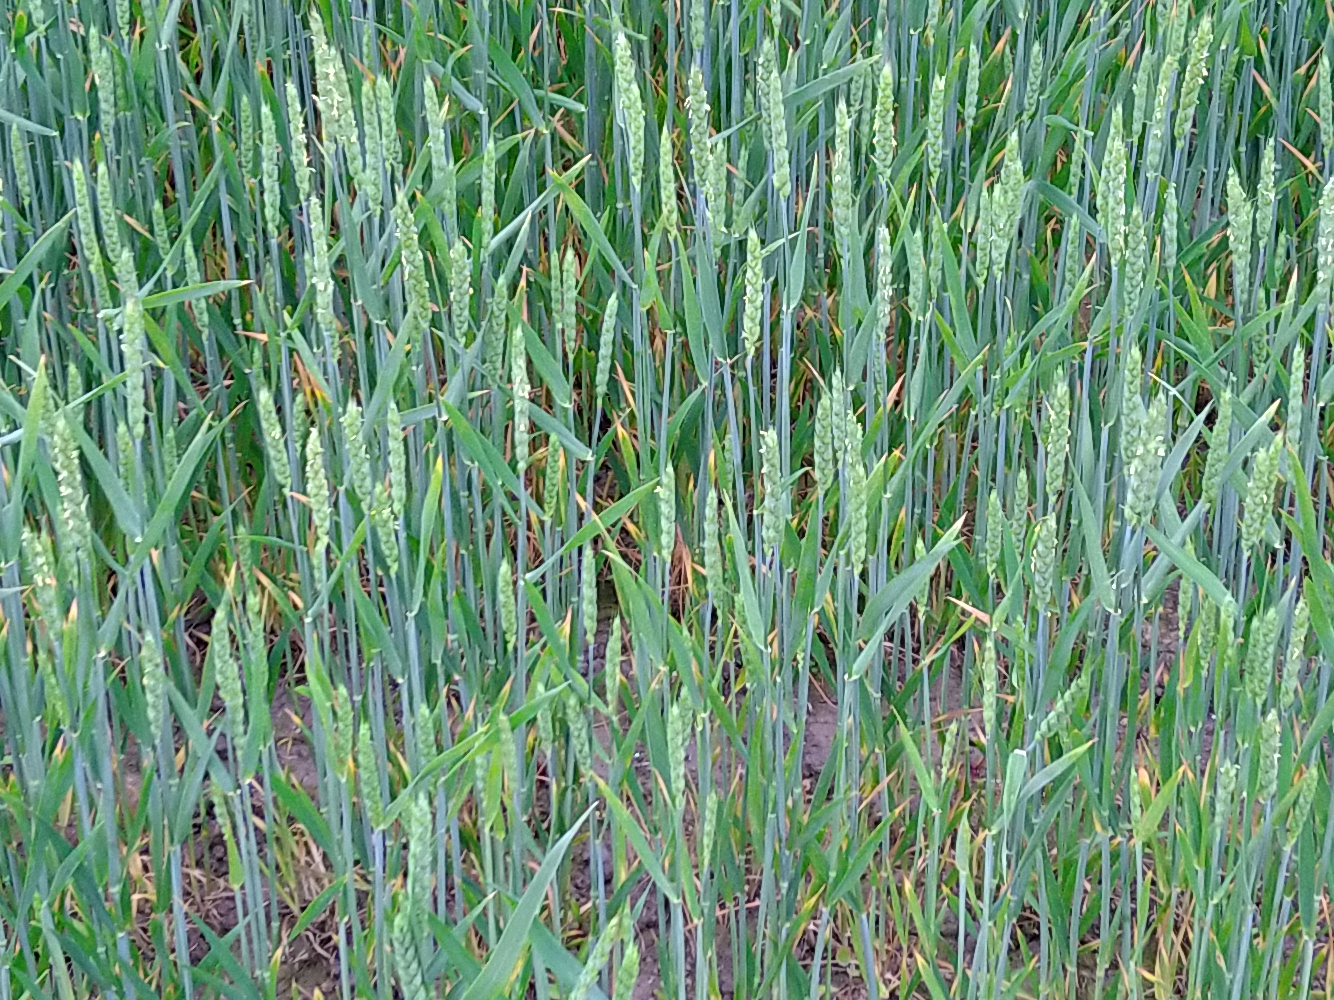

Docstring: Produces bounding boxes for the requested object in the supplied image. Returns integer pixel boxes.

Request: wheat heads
[976,186,990,283]
[1109,143,1127,262]
[626,85,645,187]
[153,200,169,261]
[475,750,488,824]
[765,0,778,29]
[1023,42,1044,123]
[703,792,717,864]
[833,102,851,254]
[358,722,382,825]
[1046,380,1070,496]
[847,57,866,126]
[873,64,895,180]
[362,79,382,210]
[734,592,759,684]
[1146,58,1175,172]
[1198,592,1216,669]
[65,359,89,418]
[1176,15,1214,141]
[378,77,401,171]
[140,633,164,741]
[499,561,517,644]
[1291,768,1318,845]
[371,484,399,571]
[915,539,928,614]
[1257,138,1276,246]
[394,194,431,336]
[114,48,129,113]
[563,248,577,352]
[927,0,941,36]
[707,141,726,241]
[53,416,90,564]
[1203,391,1233,505]
[1000,131,1023,227]
[1258,610,1279,702]
[931,217,945,288]
[117,253,137,305]
[1033,517,1057,608]
[658,464,676,561]
[183,234,208,330]
[239,95,254,178]
[584,543,589,643]
[40,530,60,570]
[213,609,246,740]
[1013,469,1028,556]
[550,251,560,330]
[1262,432,1283,522]
[38,649,69,726]
[1227,169,1252,313]
[130,0,154,28]
[263,264,276,320]
[1179,540,1195,636]
[39,361,57,443]
[928,76,944,182]
[498,712,520,802]
[908,228,923,315]
[661,126,678,232]
[1316,181,1334,304]
[386,402,406,517]
[1280,599,1310,709]
[450,245,470,344]
[689,68,709,188]
[668,703,687,806]
[611,945,640,1000]
[545,434,561,518]
[1221,591,1235,664]
[484,278,509,382]
[679,686,694,749]
[212,609,234,707]
[97,163,122,262]
[986,491,1001,576]
[1123,347,1144,466]
[94,41,115,146]
[704,488,725,608]
[1287,345,1305,460]
[990,135,1022,273]
[1319,56,1333,154]
[771,72,789,191]
[165,427,177,483]
[1037,670,1090,742]
[1017,645,1024,685]
[1124,209,1146,317]
[983,640,995,732]
[943,724,957,781]
[342,405,372,506]
[305,429,331,542]
[1066,214,1081,295]
[967,43,978,127]
[761,430,782,554]
[235,525,253,590]
[1258,712,1280,799]
[815,395,832,493]
[566,693,591,778]
[212,782,230,839]
[606,616,620,714]
[1163,186,1178,280]
[11,123,31,203]
[848,416,867,570]
[877,224,897,326]
[410,797,435,934]
[1130,770,1142,835]
[1252,287,1268,375]
[91,264,108,325]
[513,328,530,470]
[314,544,325,592]
[614,32,635,115]
[1242,454,1269,551]
[1145,394,1169,445]
[261,104,281,235]
[483,140,495,246]
[536,687,551,757]
[331,50,361,179]
[744,230,763,351]
[416,704,438,793]
[62,505,78,583]
[597,294,618,395]
[423,75,455,226]
[21,0,46,31]
[691,0,706,48]
[72,161,97,268]
[117,428,135,501]
[309,12,335,146]
[1126,436,1170,524]
[1097,109,1122,233]
[112,0,130,35]
[309,198,338,355]
[122,304,145,439]
[334,685,353,771]
[392,898,433,1000]
[833,371,847,468]
[555,921,619,1000]
[756,41,775,143]
[258,390,290,490]
[1069,132,1082,198]
[286,82,309,201]
[1274,229,1288,288]
[1169,0,1196,62]
[733,149,750,222]
[1217,763,1236,829]
[21,533,60,641]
